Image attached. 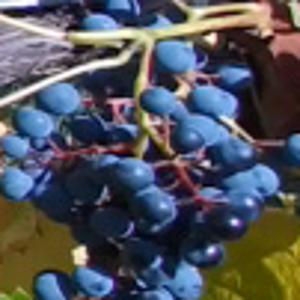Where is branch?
<instances>
[{
	"instance_id": "1",
	"label": "branch",
	"mask_w": 300,
	"mask_h": 300,
	"mask_svg": "<svg viewBox=\"0 0 300 300\" xmlns=\"http://www.w3.org/2000/svg\"><path fill=\"white\" fill-rule=\"evenodd\" d=\"M274 19V13L266 9L263 14L245 12L227 18H209L194 23L173 25H127L120 27L101 28L98 31L72 29L58 32L49 28L36 26L25 22L15 15L0 13V22L10 24L18 30L54 41H64L69 44L77 42L89 44L135 45L145 40L151 42L165 41L171 38L188 37L206 32H229L246 30L254 27H268Z\"/></svg>"
}]
</instances>
